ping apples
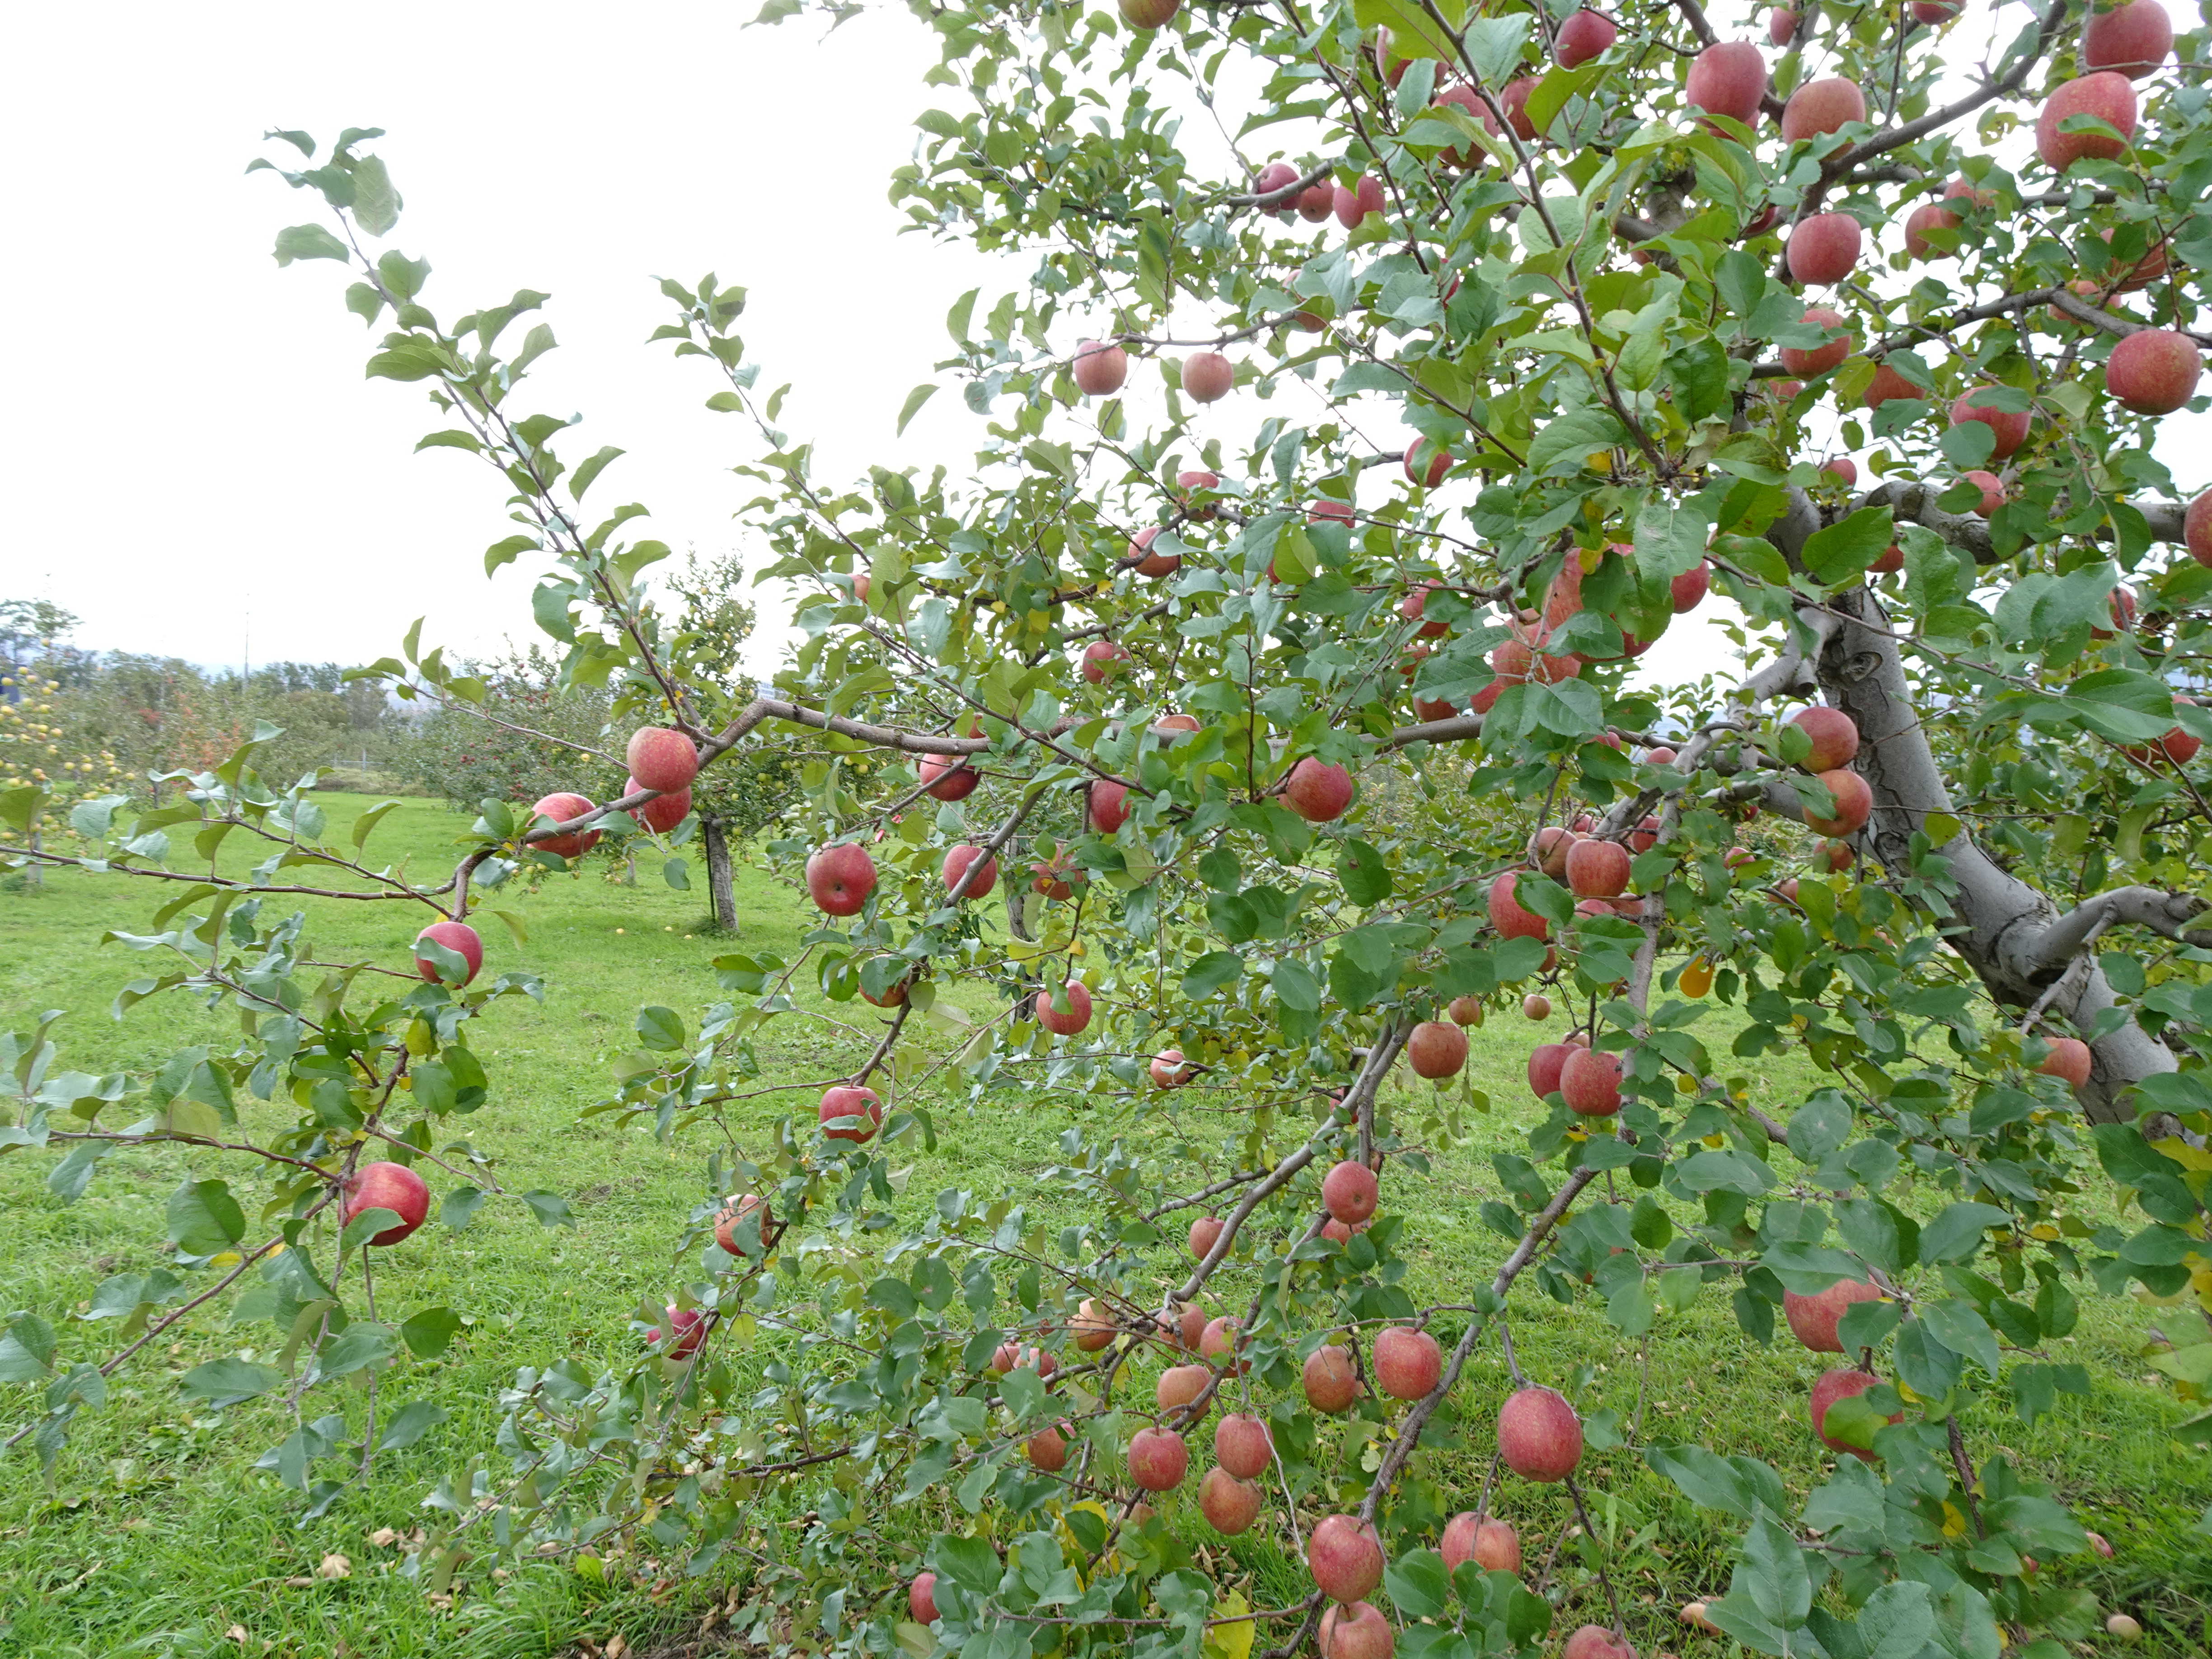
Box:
[1287,754,1354,825]
[1911,0,1970,27]
[1663,382,1698,422]
[1851,927,1895,964]
[1486,870,1567,945]
[1501,73,1567,143]
[627,724,700,791]
[1801,767,1874,838]
[1529,938,1558,976]
[2086,206,2173,296]
[1861,361,1930,416]
[1448,996,1483,1029]
[1782,76,1867,164]
[1267,540,1319,588]
[1402,573,1461,641]
[1082,641,1137,689]
[1698,106,1763,167]
[958,706,1002,749]
[1406,1018,1470,1081]
[1321,1160,1380,1225]
[1530,826,1589,889]
[1679,1599,1725,1642]
[1906,199,1966,262]
[941,841,999,902]
[336,1161,429,1248]
[1811,839,1861,874]
[1026,840,1083,901]
[1947,468,2006,519]
[1611,892,1651,924]
[1584,725,1622,762]
[1577,1226,1626,1286]
[1423,81,1503,173]
[1154,1364,1212,1425]
[1112,1502,1160,1546]
[1202,1315,1256,1380]
[1574,900,1615,945]
[1079,774,1156,835]
[2019,482,2055,516]
[1024,1415,1082,1473]
[2078,1,2174,83]
[1815,458,1860,498]
[1012,1347,1059,1396]
[819,1081,882,1143]
[1126,1420,1189,1494]
[1067,1297,1120,1352]
[838,572,879,615]
[1861,518,1914,574]
[2106,326,2203,419]
[1250,163,1305,218]
[1152,714,1202,765]
[523,790,604,859]
[2185,483,2212,573]
[1809,1368,1907,1463]
[988,1341,1022,1378]
[1528,1043,1587,1107]
[2070,1530,2112,1574]
[1628,216,1680,272]
[1116,0,1190,35]
[2033,70,2138,180]
[1336,173,1392,232]
[1948,383,2032,463]
[1783,1261,1887,1354]
[1171,470,1224,524]
[1778,305,1850,379]
[1328,1080,1369,1124]
[1758,358,1808,415]
[1554,6,1619,78]
[1644,745,1685,785]
[2018,1549,2046,1571]
[1073,338,1130,396]
[1634,536,1714,614]
[1765,876,1808,916]
[1439,1509,1526,1593]
[1201,1465,1262,1534]
[1567,841,1628,902]
[919,742,984,800]
[1032,979,1093,1033]
[1181,350,1234,404]
[1631,814,1672,857]
[646,1300,710,1369]
[1212,1411,1275,1479]
[2116,692,2202,771]
[1564,1622,1644,1659]
[1300,1343,1365,1416]
[1317,1601,1396,1659]
[858,955,918,1006]
[1189,1215,1232,1261]
[1308,498,1358,542]
[909,1569,963,1629]
[2028,1035,2092,1091]
[1596,947,1641,997]
[1320,1215,1366,1263]
[1490,608,1581,701]
[1403,435,1456,487]
[1943,170,2003,238]
[1296,176,1337,225]
[1725,174,1782,236]
[715,1192,773,1259]
[1768,0,1812,53]
[1786,213,1864,286]
[1536,535,1667,665]
[1495,1385,1586,1486]
[1157,1304,1207,1354]
[2047,261,2126,334]
[1475,659,1526,727]
[1270,778,1293,814]
[1150,1049,1190,1091]
[2107,1613,2145,1643]
[1708,525,1763,571]
[1781,703,1861,776]
[1129,522,1186,578]
[1410,677,1465,730]
[806,838,876,917]
[626,775,694,833]
[2067,585,2133,653]
[1281,269,1336,335]
[1375,16,1451,98]
[1034,153,1066,183]
[1720,844,1760,882]
[1562,812,1599,849]
[1722,796,1762,824]
[1537,20,1572,59]
[1560,1049,1629,1116]
[1473,2,1548,38]
[412,921,482,987]
[1521,992,1554,1021]
[1372,1324,1443,1401]
[1391,642,1432,686]
[1414,257,1464,309]
[1307,1513,1387,1605]
[1683,38,1766,127]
